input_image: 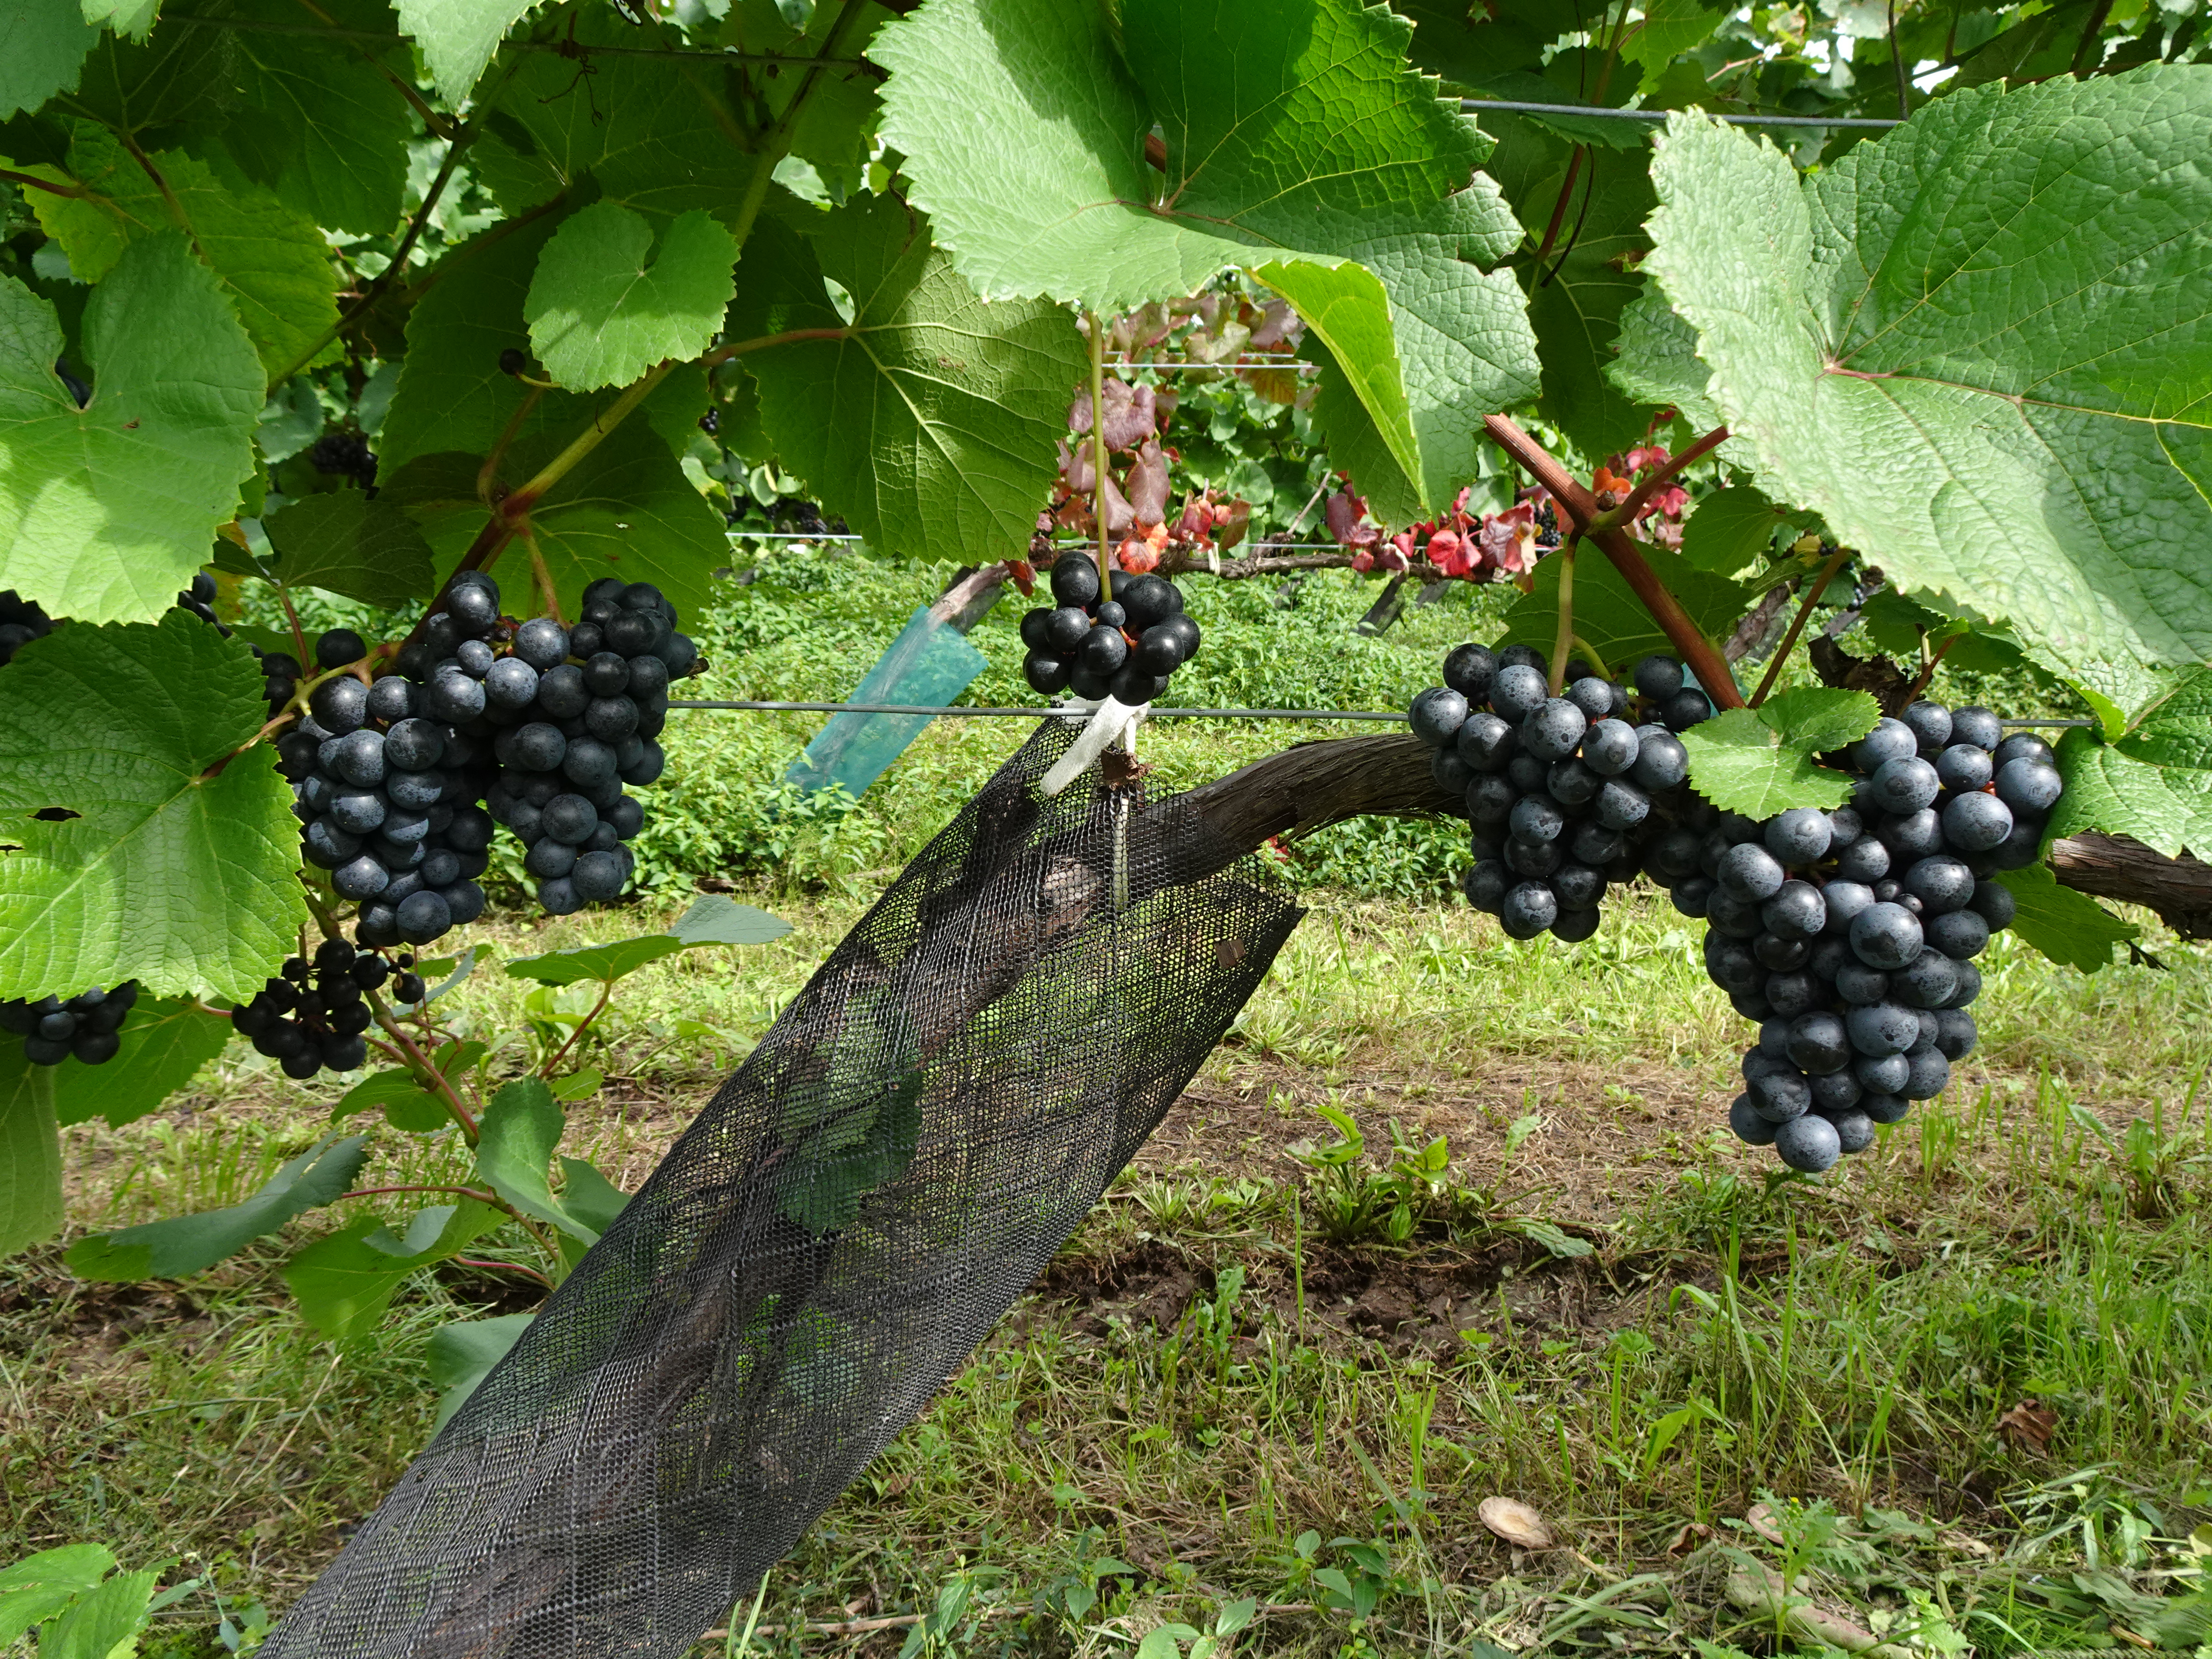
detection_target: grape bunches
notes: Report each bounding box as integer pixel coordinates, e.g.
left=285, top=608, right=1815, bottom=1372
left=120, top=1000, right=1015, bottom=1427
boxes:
left=1019, top=552, right=1200, bottom=705
left=0, top=979, right=138, bottom=1066
left=0, top=590, right=50, bottom=667
left=179, top=574, right=233, bottom=640
left=1409, top=643, right=1712, bottom=943
left=1642, top=777, right=1729, bottom=918
left=232, top=940, right=372, bottom=1077
left=260, top=630, right=495, bottom=949
left=353, top=921, right=424, bottom=1004
left=1705, top=703, right=2063, bottom=1174
left=424, top=572, right=697, bottom=915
